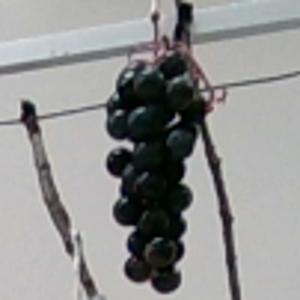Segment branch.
<instances>
[{
    "instance_id": "2",
    "label": "branch",
    "mask_w": 300,
    "mask_h": 300,
    "mask_svg": "<svg viewBox=\"0 0 300 300\" xmlns=\"http://www.w3.org/2000/svg\"><path fill=\"white\" fill-rule=\"evenodd\" d=\"M199 130L200 141L203 144V156L207 161V168L212 177L213 189L216 195L217 214L222 224V240L225 250V270L230 300H242L241 283L239 278V258L237 256V239L233 224L236 217L230 205L229 195L222 169L223 157L217 152V146L205 120L195 123Z\"/></svg>"
},
{
    "instance_id": "3",
    "label": "branch",
    "mask_w": 300,
    "mask_h": 300,
    "mask_svg": "<svg viewBox=\"0 0 300 300\" xmlns=\"http://www.w3.org/2000/svg\"><path fill=\"white\" fill-rule=\"evenodd\" d=\"M173 6L176 20L172 29L171 48L186 52L192 60L194 3L187 0H173Z\"/></svg>"
},
{
    "instance_id": "1",
    "label": "branch",
    "mask_w": 300,
    "mask_h": 300,
    "mask_svg": "<svg viewBox=\"0 0 300 300\" xmlns=\"http://www.w3.org/2000/svg\"><path fill=\"white\" fill-rule=\"evenodd\" d=\"M38 106L34 101L21 96L19 102V119L26 129L28 141L32 147L33 164L38 180L41 199L47 206L52 223L61 238L64 252L70 256L79 279V284L86 292L88 300H105L92 277L84 253L83 237L80 228L74 232L69 213L63 206L54 180L51 163L42 140V128L38 120Z\"/></svg>"
}]
</instances>
